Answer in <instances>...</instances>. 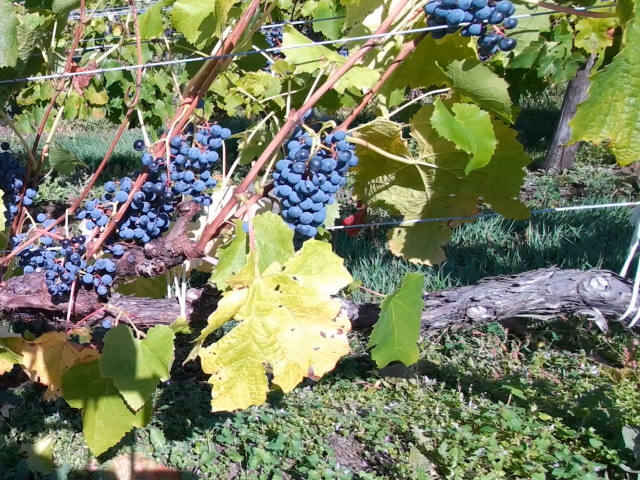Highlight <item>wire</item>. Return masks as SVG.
Wrapping results in <instances>:
<instances>
[{
  "instance_id": "f0478fcc",
  "label": "wire",
  "mask_w": 640,
  "mask_h": 480,
  "mask_svg": "<svg viewBox=\"0 0 640 480\" xmlns=\"http://www.w3.org/2000/svg\"><path fill=\"white\" fill-rule=\"evenodd\" d=\"M559 13L558 9L549 10V11H541L538 13H528V14H516V19H530V18H541L543 16H552L557 15Z\"/></svg>"
},
{
  "instance_id": "a73af890",
  "label": "wire",
  "mask_w": 640,
  "mask_h": 480,
  "mask_svg": "<svg viewBox=\"0 0 640 480\" xmlns=\"http://www.w3.org/2000/svg\"><path fill=\"white\" fill-rule=\"evenodd\" d=\"M498 213H473L468 215H456L450 217H434V218H421V219H403V220H388V221H372L363 223H342L337 225L324 226V231L339 230L344 228H365V227H387L390 225H406V224H424V223H437V222H452L458 220H470L475 218H498Z\"/></svg>"
},
{
  "instance_id": "a009ed1b",
  "label": "wire",
  "mask_w": 640,
  "mask_h": 480,
  "mask_svg": "<svg viewBox=\"0 0 640 480\" xmlns=\"http://www.w3.org/2000/svg\"><path fill=\"white\" fill-rule=\"evenodd\" d=\"M619 6H620L619 2H609V3H602V4H593V5H588V6H577L576 10L577 11H591V10H596V9H604V8L619 7Z\"/></svg>"
},
{
  "instance_id": "4f2155b8",
  "label": "wire",
  "mask_w": 640,
  "mask_h": 480,
  "mask_svg": "<svg viewBox=\"0 0 640 480\" xmlns=\"http://www.w3.org/2000/svg\"><path fill=\"white\" fill-rule=\"evenodd\" d=\"M640 200L636 201H615L611 203H584L579 205L561 206V207H537L531 210L532 214L539 212H564L572 210H581L586 208H613L618 206H639Z\"/></svg>"
},
{
  "instance_id": "d2f4af69",
  "label": "wire",
  "mask_w": 640,
  "mask_h": 480,
  "mask_svg": "<svg viewBox=\"0 0 640 480\" xmlns=\"http://www.w3.org/2000/svg\"><path fill=\"white\" fill-rule=\"evenodd\" d=\"M448 25H434L429 27H421V28H412V29H402V30H392V31H381L378 33L365 34L360 36H348L337 38L328 41H315V42H307V43H290L284 44L280 46L274 47H260V48H249L247 50H241L237 52L224 53L216 56H202V57H194V58H176L172 60H159L153 63H141V64H128L122 66H108L106 68H95L86 71H71L64 72L60 74H45L39 76H31V77H22V78H3L0 80V84L5 83H24V82H33V81H41L47 79H62L66 77L73 76H88L94 75L98 73H109L111 71H124L130 69H144V68H155L161 65H174L178 63H196V62H204V61H218L232 57H240L243 55H249L251 53H262V52H276L282 51L286 49L292 48H309V47H317V46H330L344 42L350 41H362L367 39H375L383 36H394V35H404V34H414V33H423V32H431L437 30H448Z\"/></svg>"
}]
</instances>
